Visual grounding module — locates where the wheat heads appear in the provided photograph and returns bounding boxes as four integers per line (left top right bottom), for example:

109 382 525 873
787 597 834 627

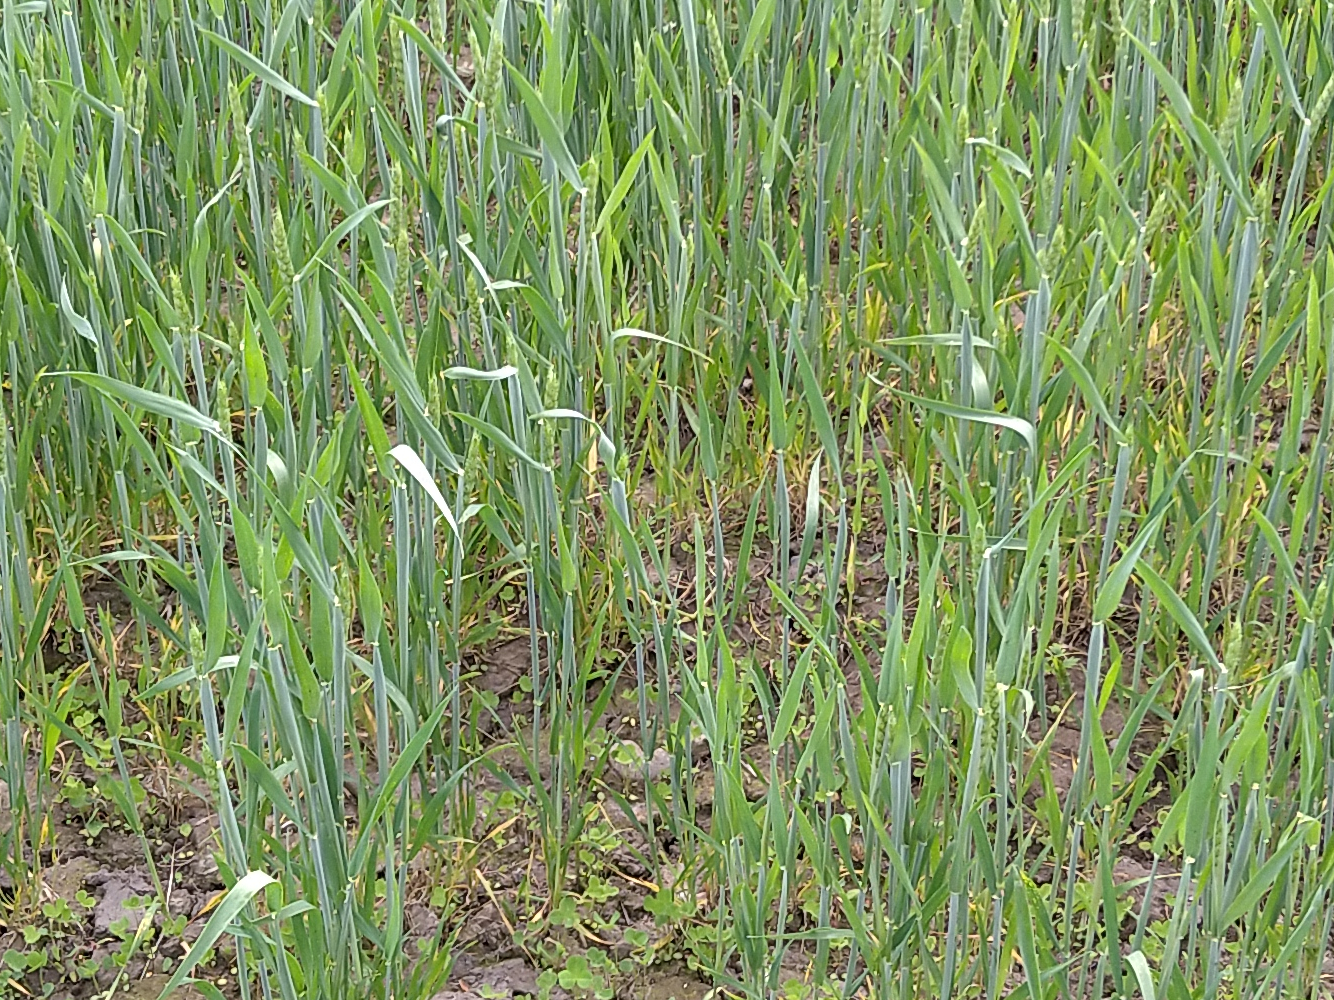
741 143 760 237
226 315 240 363
956 0 976 73
983 108 996 164
171 266 191 341
707 11 729 89
983 664 999 780
1291 842 1298 889
1311 65 1334 137
870 0 883 65
436 139 448 183
406 197 418 231
1308 840 1315 889
584 156 599 259
1325 115 1334 203
927 617 949 735
1135 0 1150 37
1042 168 1055 224
425 377 439 425
468 26 484 93
1213 801 1226 871
269 208 296 311
1210 80 1242 193
420 0 456 53
21 121 40 207
0 226 20 294
463 434 481 496
1068 0 1089 44
139 0 149 28
288 127 314 184
540 377 559 467
0 413 5 476
744 62 758 123
1130 196 1165 263
1313 581 1330 636
26 30 42 131
123 64 131 128
269 0 278 24
467 270 479 350
134 72 147 133
82 172 93 211
388 14 404 99
395 228 408 323
632 42 638 92
481 32 500 125
1046 229 1066 275
416 290 431 324
452 110 465 181
217 379 232 434
961 210 984 264
303 225 316 281
102 0 109 15
392 162 403 240
956 105 968 156
1041 0 1053 24
1108 0 1123 40
228 80 251 190
317 87 326 136
313 0 324 53
874 705 890 773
